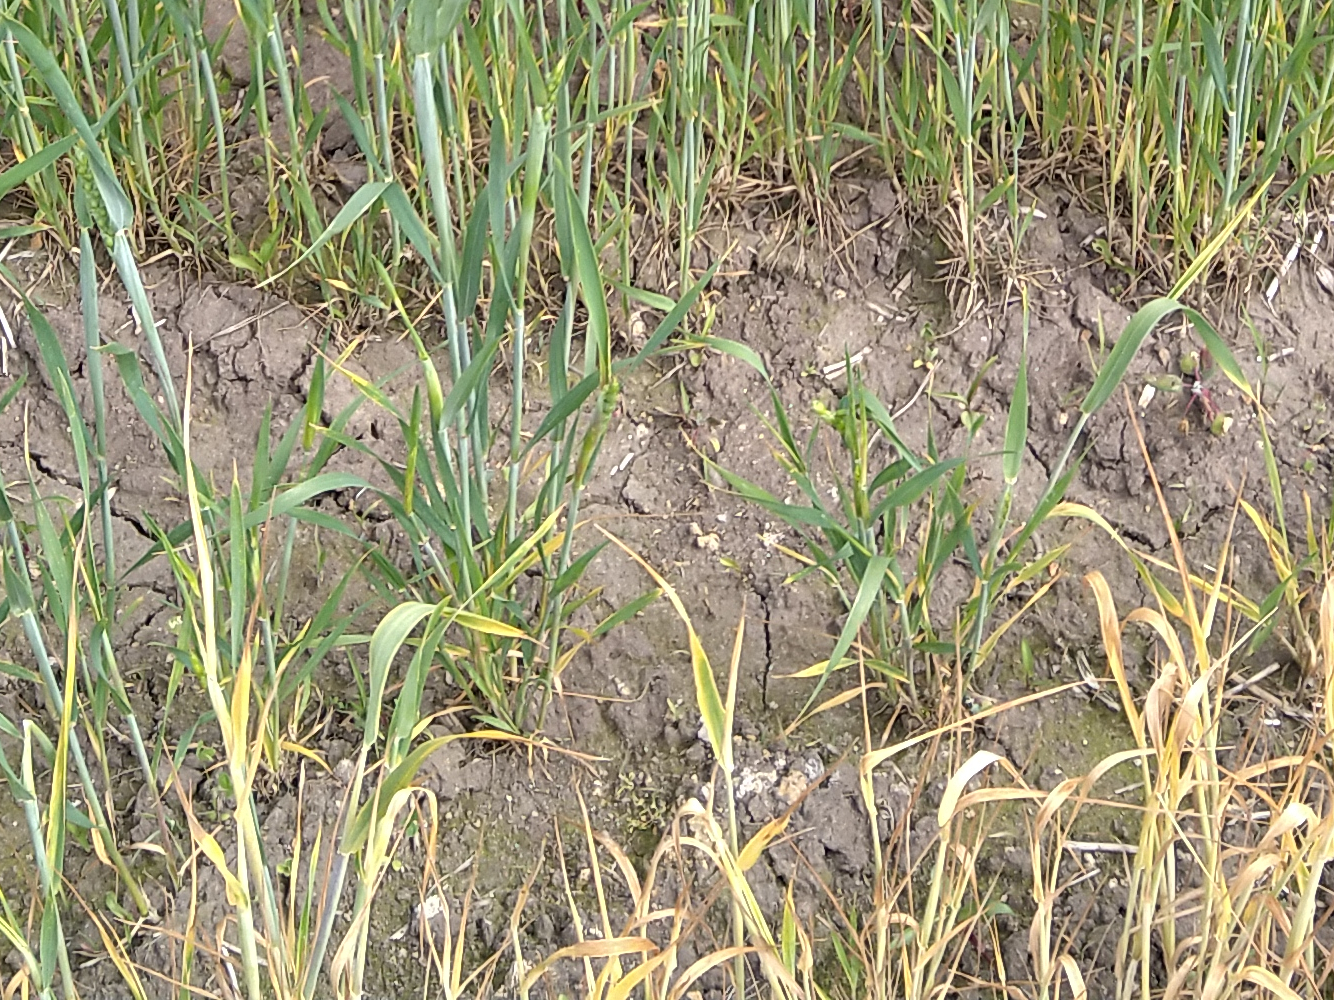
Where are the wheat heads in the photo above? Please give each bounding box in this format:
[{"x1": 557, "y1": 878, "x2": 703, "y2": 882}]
[
  {"x1": 76, "y1": 139, "x2": 117, "y2": 250},
  {"x1": 546, "y1": 58, "x2": 566, "y2": 122}
]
